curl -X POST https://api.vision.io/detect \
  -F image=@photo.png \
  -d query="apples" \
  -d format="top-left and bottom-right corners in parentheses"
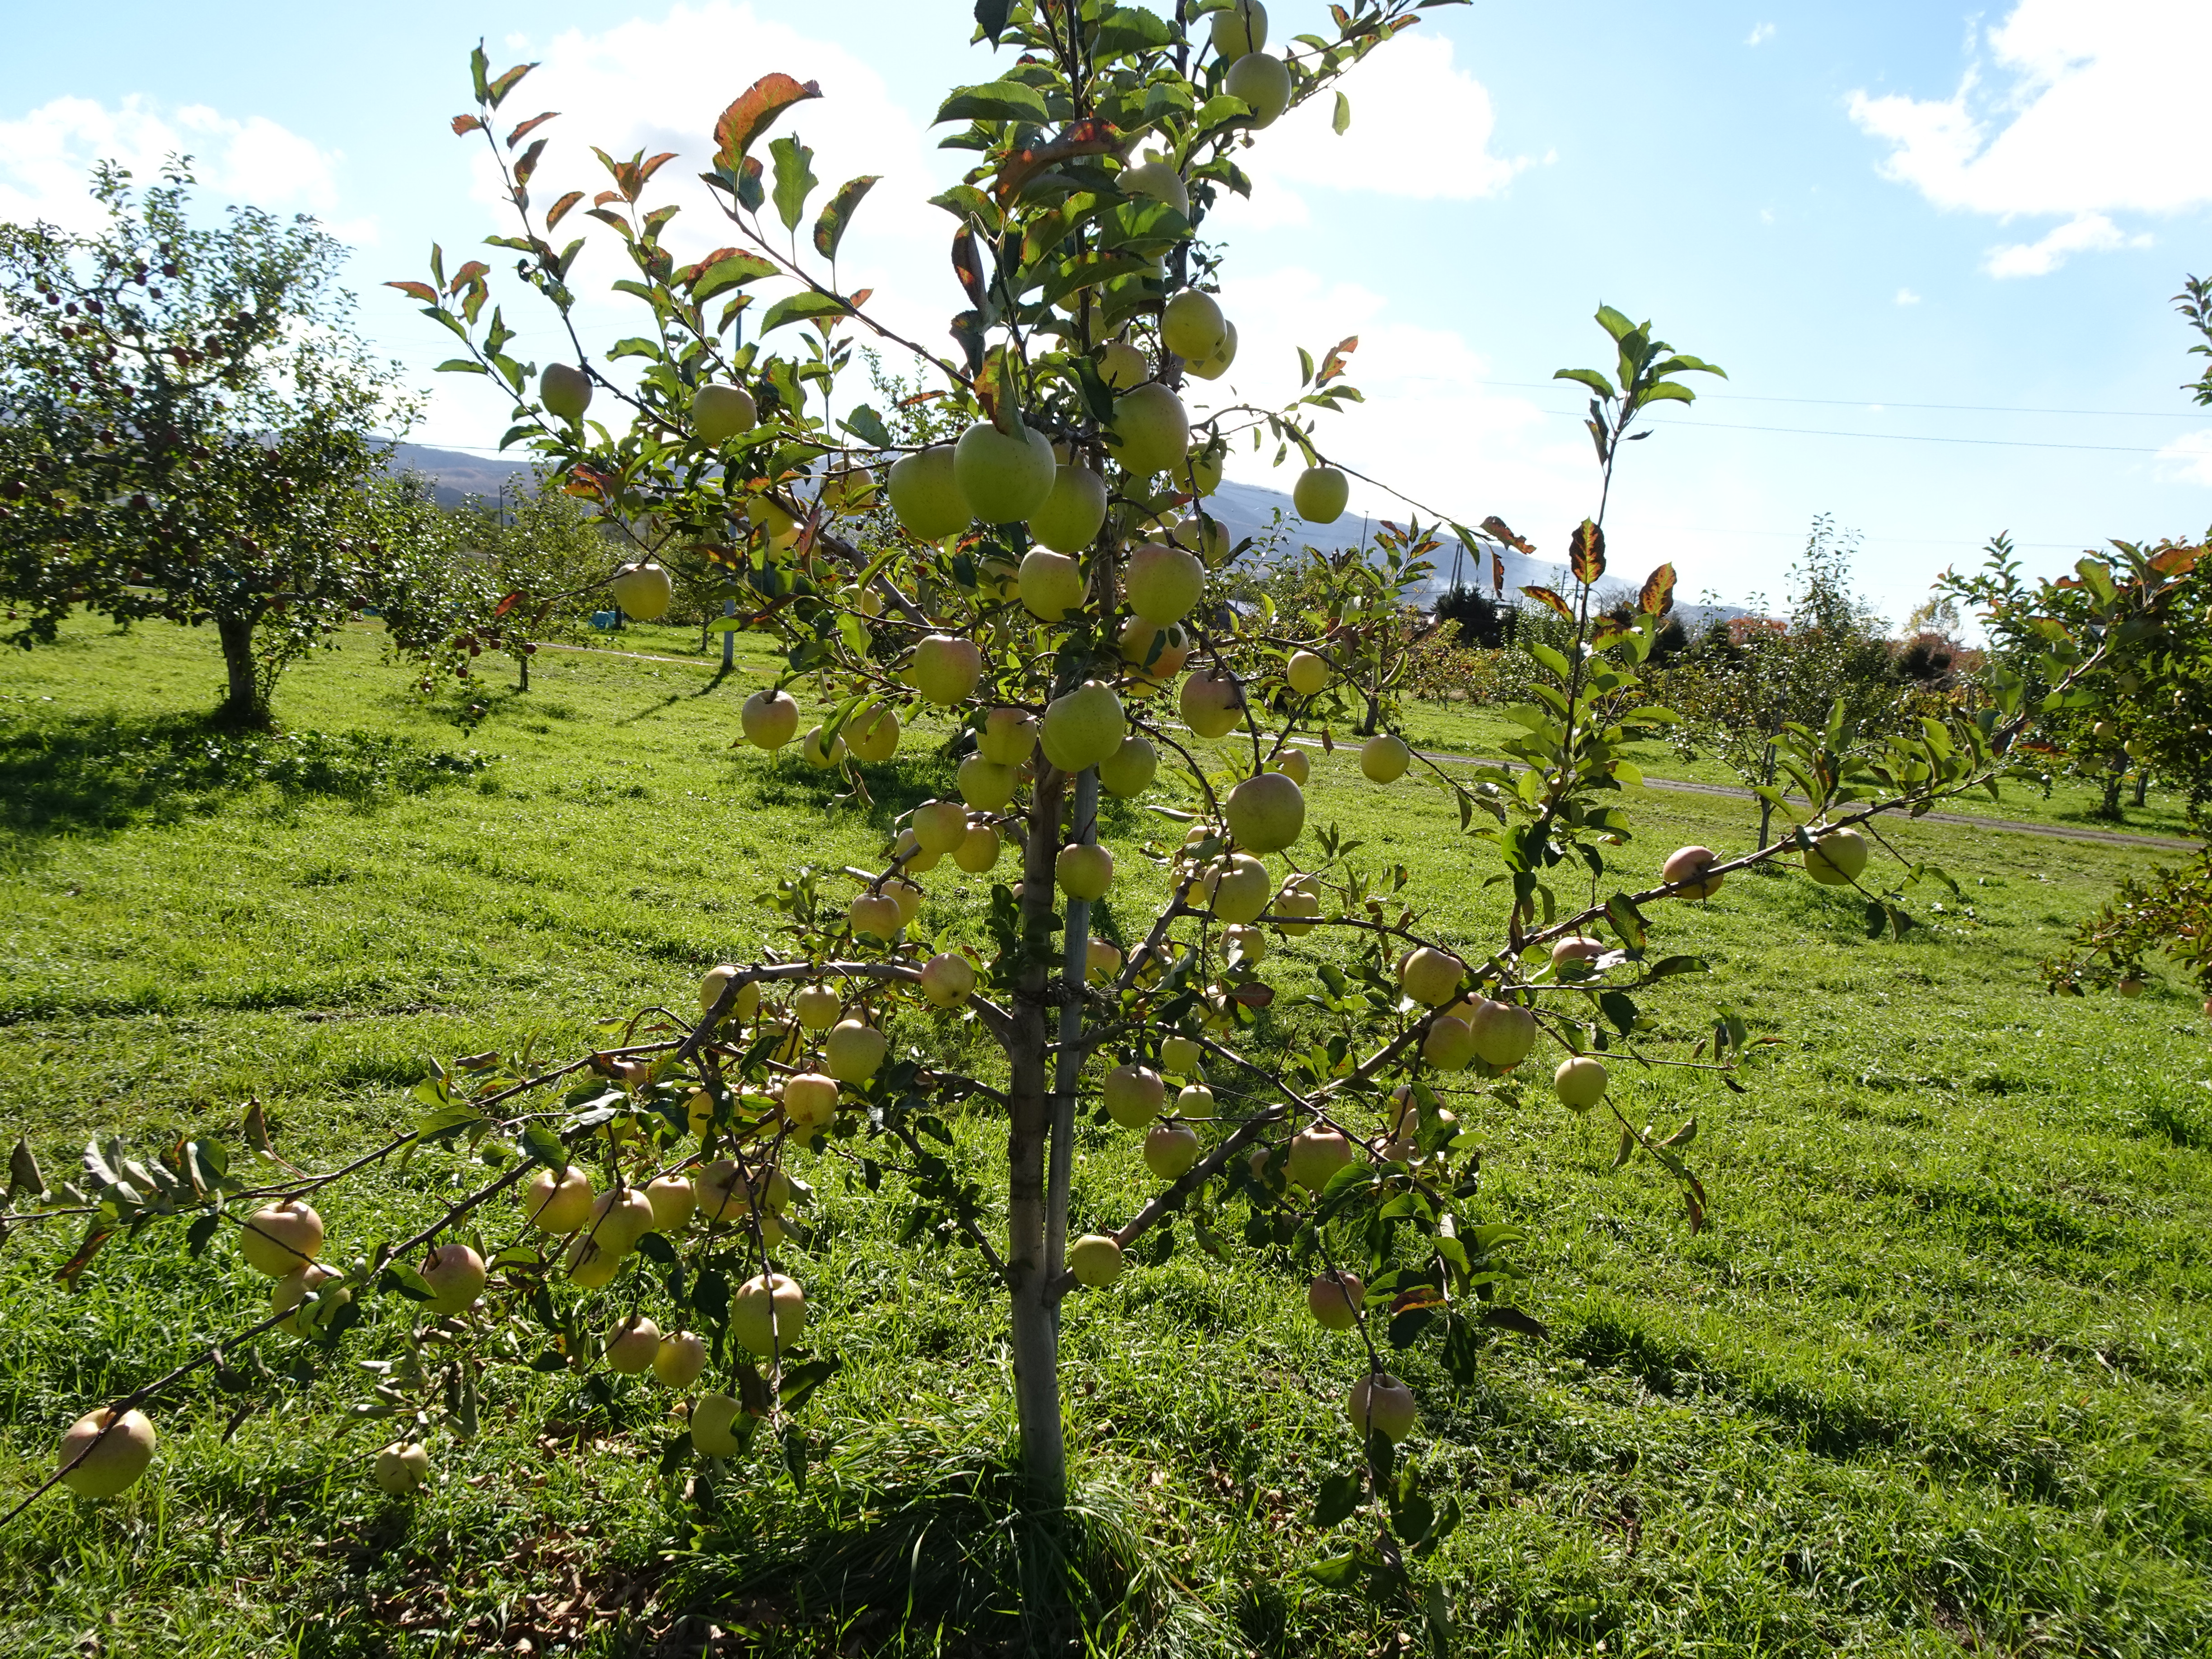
top-left (1122, 655), bottom-right (1164, 697)
top-left (1662, 845), bottom-right (1725, 901)
top-left (650, 1328), bottom-right (704, 1390)
top-left (1093, 343), bottom-right (1150, 398)
top-left (954, 420), bottom-right (1057, 526)
top-left (745, 486), bottom-right (800, 540)
top-left (1210, 0), bottom-right (1268, 67)
top-left (1214, 813), bottom-right (1274, 868)
top-left (1064, 308), bottom-right (1109, 359)
top-left (743, 568), bottom-right (788, 616)
top-left (1402, 945), bottom-right (1463, 1006)
top-left (1038, 678), bottom-right (1127, 775)
top-left (1012, 756), bottom-right (1038, 788)
top-left (1160, 1029), bottom-right (1199, 1073)
top-left (1104, 1063), bottom-right (1165, 1130)
top-left (766, 527), bottom-right (822, 580)
top-left (1606, 832), bottom-right (1625, 850)
top-left (540, 365), bottom-right (592, 421)
top-left (5, 610), bottom-right (18, 622)
top-left (1170, 860), bottom-right (1213, 906)
top-left (1360, 735), bottom-right (1410, 784)
top-left (745, 1215), bottom-right (791, 1247)
top-left (1050, 264), bottom-right (1102, 312)
top-left (411, 1242), bottom-right (486, 1313)
top-left (756, 1017), bottom-right (805, 1068)
top-left (730, 1155), bottom-right (775, 1201)
top-left (920, 951), bottom-right (976, 1010)
top-left (730, 1272), bottom-right (805, 1358)
top-left (976, 706), bottom-right (1037, 768)
top-left (1226, 773), bottom-right (1305, 855)
top-left (841, 1005), bottom-right (888, 1044)
top-left (1054, 842), bottom-right (1114, 904)
top-left (824, 1019), bottom-right (886, 1086)
top-left (912, 797), bottom-right (967, 855)
top-left (1471, 1000), bottom-right (1536, 1065)
top-left (565, 1236), bottom-right (622, 1287)
top-left (784, 1071), bottom-right (839, 1128)
top-left (1248, 1146), bottom-right (1297, 1190)
top-left (1293, 466), bottom-right (1348, 524)
top-left (804, 723), bottom-right (846, 771)
top-left (1062, 769), bottom-right (1084, 792)
top-left (2207, 602), bottom-right (2212, 627)
top-left (270, 1266), bottom-right (351, 1342)
top-left (1273, 890), bottom-right (1318, 936)
top-left (1271, 1213), bottom-right (1305, 1247)
top-left (1196, 984), bottom-right (1243, 1030)
top-left (1115, 615), bottom-right (1189, 680)
top-left (738, 1145), bottom-right (780, 1178)
top-left (1552, 935), bottom-right (1604, 984)
top-left (1596, 833), bottom-right (1609, 848)
top-left (957, 750), bottom-right (1018, 812)
top-left (914, 635), bottom-right (982, 706)
top-left (1026, 463), bottom-right (1107, 555)
top-left (977, 549), bottom-right (1024, 609)
top-left (578, 1055), bottom-right (637, 1097)
top-left (1224, 53), bottom-right (1292, 132)
top-left (1171, 441), bottom-right (1224, 498)
top-left (757, 1360), bottom-right (784, 1387)
top-left (1182, 825), bottom-right (1229, 859)
top-left (740, 1084), bottom-right (790, 1137)
top-left (1100, 382), bottom-right (1189, 480)
top-left (241, 1201), bottom-right (324, 1277)
top-left (848, 891), bottom-right (900, 945)
top-left (893, 642), bottom-right (930, 689)
top-left (887, 443), bottom-right (978, 541)
top-left (1376, 1147), bottom-right (1442, 1193)
top-left (1347, 1374), bottom-right (1416, 1447)
top-left (1099, 737), bottom-right (1155, 800)
top-left (1328, 615), bottom-right (1351, 637)
top-left (1204, 854), bottom-right (1269, 925)
top-left (951, 821), bottom-right (1000, 874)
top-left (923, 616), bottom-right (956, 650)
top-left (1013, 881), bottom-right (1034, 905)
top-left (843, 700), bottom-right (901, 761)
top-left (611, 563), bottom-right (673, 622)
top-left (1173, 513), bottom-right (1234, 574)
top-left (1401, 1107), bottom-right (1461, 1157)
top-left (1170, 1107), bottom-right (1207, 1138)
top-left (1422, 1015), bottom-right (1474, 1072)
top-left (1803, 825), bottom-right (1867, 886)
top-left (375, 1442), bottom-right (428, 1493)
top-left (1105, 161), bottom-right (1190, 260)
top-left (740, 689), bottom-right (797, 749)
top-left (700, 966), bottom-right (761, 1028)
top-left (1102, 68), bottom-right (1140, 99)
top-left (695, 1161), bottom-right (757, 1223)
top-left (742, 1166), bottom-right (792, 1220)
top-left (876, 880), bottom-right (919, 930)
top-left (1159, 289), bottom-right (1227, 360)
top-left (1281, 873), bottom-right (1321, 908)
top-left (1308, 1270), bottom-right (1365, 1330)
top-left (1441, 991), bottom-right (1492, 1037)
top-left (1127, 509), bottom-right (1183, 559)
top-left (589, 1187), bottom-right (653, 1256)
top-left (1386, 1083), bottom-right (1446, 1140)
top-left (1017, 542), bottom-right (1092, 624)
top-left (1553, 1057), bottom-right (1607, 1112)
top-left (843, 1078), bottom-right (878, 1116)
top-left (1286, 652), bottom-right (1327, 694)
top-left (1177, 318), bottom-right (1236, 381)
top-left (756, 1071), bottom-right (798, 1119)
top-left (1143, 1120), bottom-right (1199, 1180)
top-left (795, 986), bottom-right (842, 1031)
top-left (1071, 1234), bottom-right (1122, 1287)
top-left (691, 1393), bottom-right (756, 1461)
top-left (1074, 937), bottom-right (1122, 982)
top-left (57, 1409), bottom-right (157, 1499)
top-left (818, 456), bottom-right (876, 517)
top-left (1295, 1123), bottom-right (1355, 1195)
top-left (605, 1315), bottom-right (660, 1376)
top-left (914, 1069), bottom-right (933, 1088)
top-left (1178, 1084), bottom-right (1215, 1120)
top-left (692, 384), bottom-right (756, 450)
top-left (526, 1164), bottom-right (593, 1236)
top-left (668, 1403), bottom-right (692, 1428)
top-left (834, 584), bottom-right (883, 628)
top-left (961, 799), bottom-right (1010, 841)
top-left (1025, 424), bottom-right (1089, 483)
top-left (959, 607), bottom-right (976, 627)
top-left (1124, 541), bottom-right (1205, 626)
top-left (686, 1091), bottom-right (735, 1139)
top-left (1366, 1129), bottom-right (1411, 1172)
top-left (1395, 948), bottom-right (1438, 989)
top-left (644, 1174), bottom-right (698, 1231)
top-left (1179, 665), bottom-right (1248, 740)
top-left (794, 1120), bottom-right (826, 1150)
top-left (593, 1101), bottom-right (636, 1142)
top-left (896, 825), bottom-right (941, 872)
top-left (1126, 941), bottom-right (1175, 990)
top-left (1262, 748), bottom-right (1311, 788)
